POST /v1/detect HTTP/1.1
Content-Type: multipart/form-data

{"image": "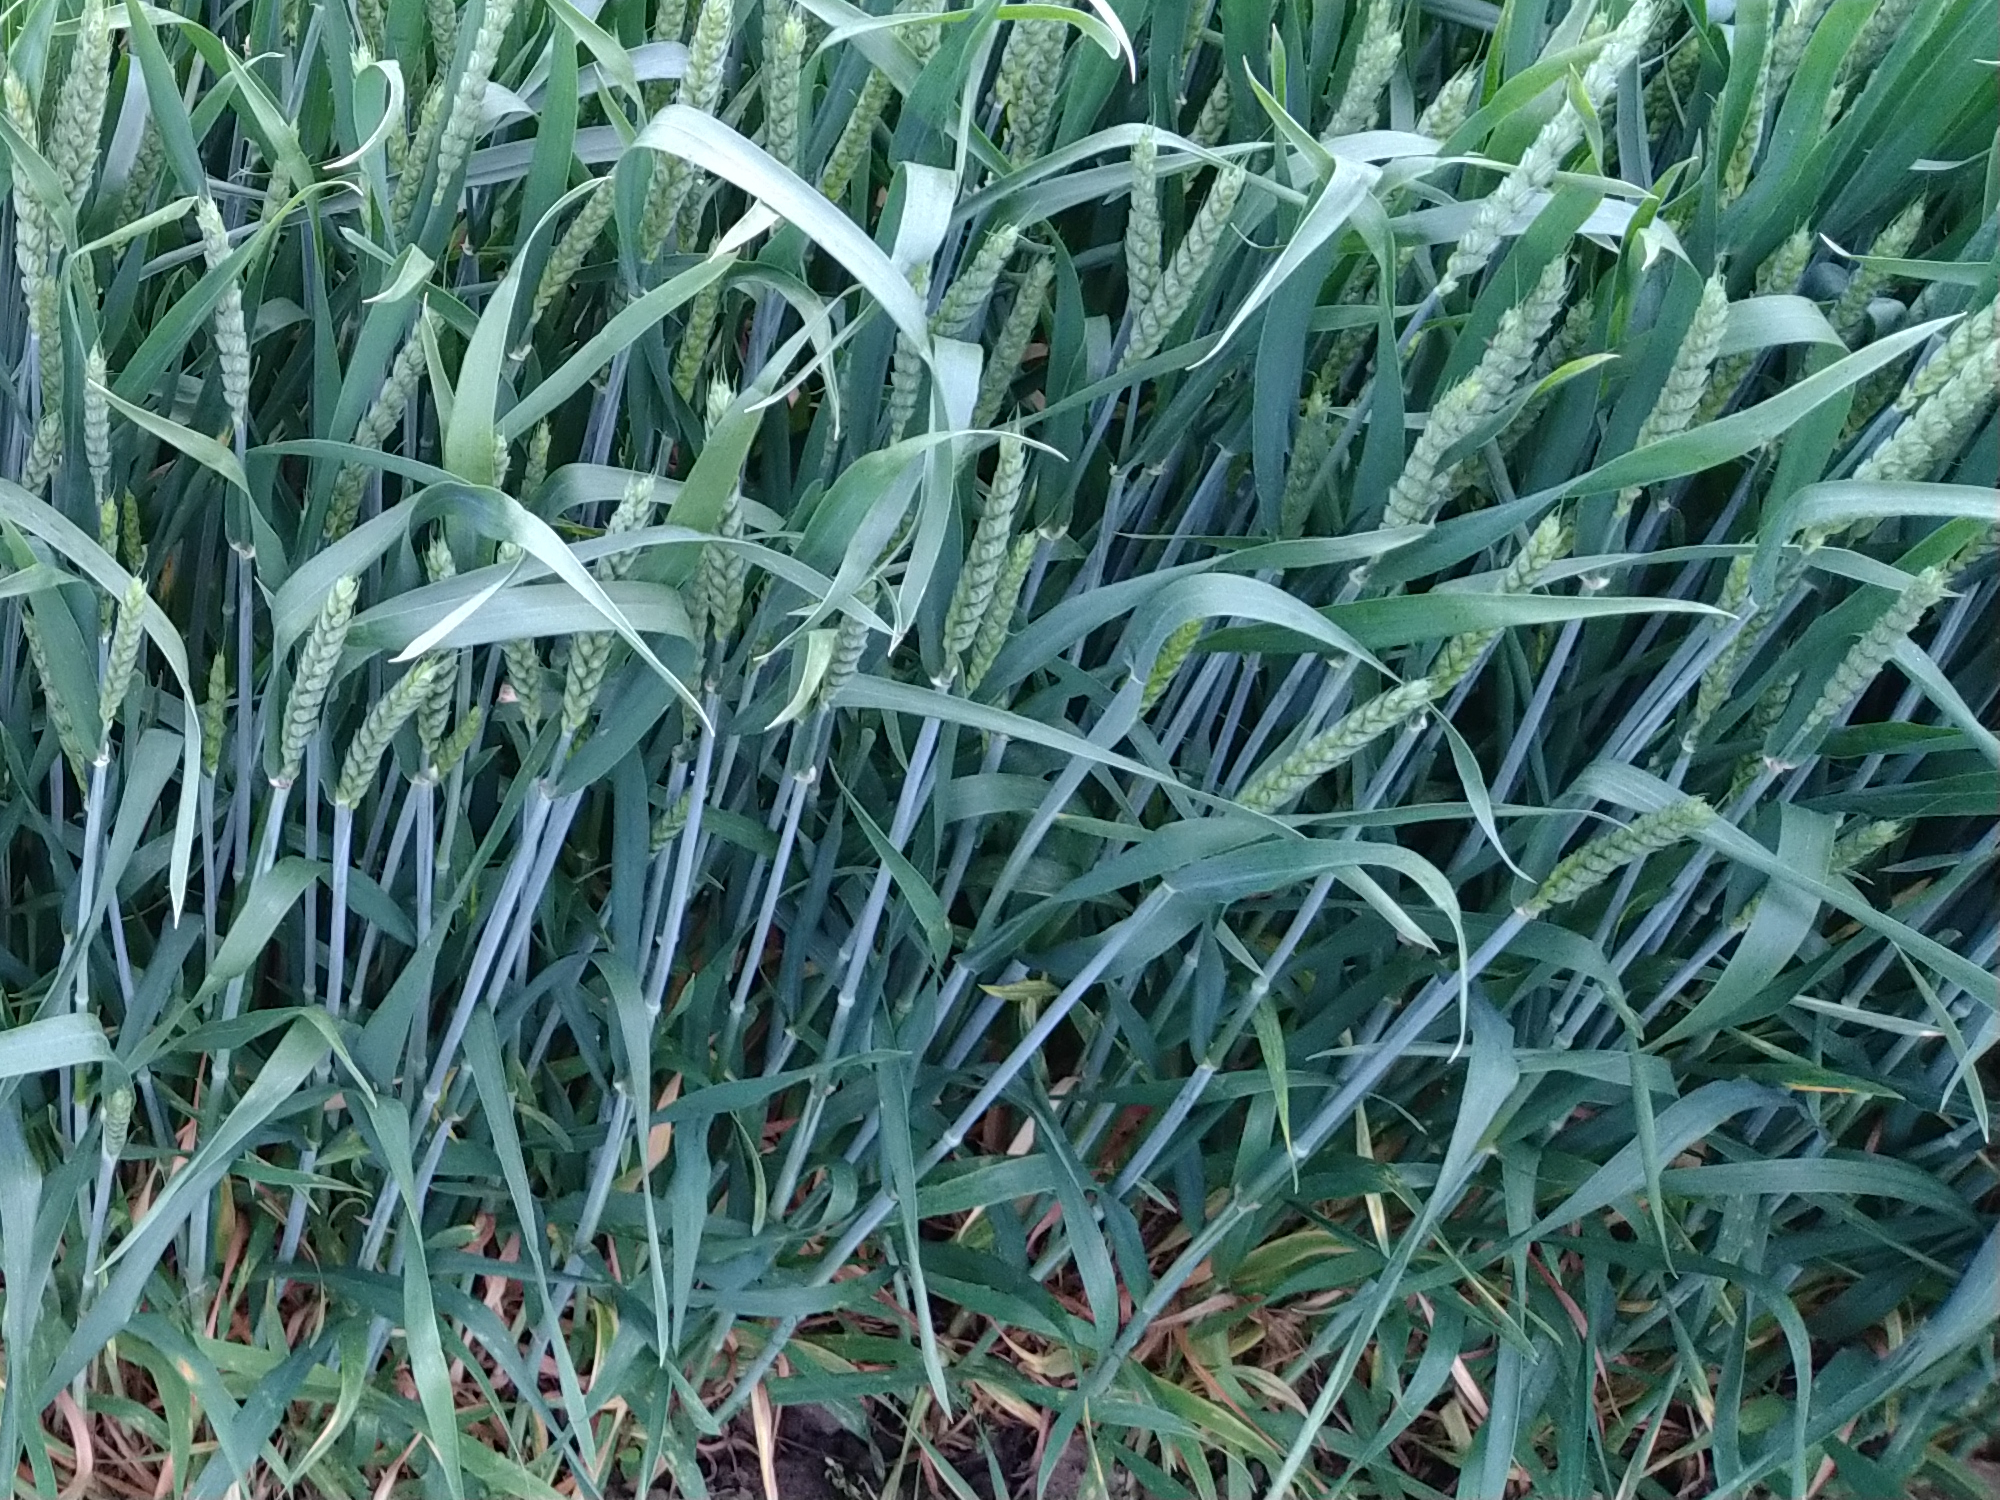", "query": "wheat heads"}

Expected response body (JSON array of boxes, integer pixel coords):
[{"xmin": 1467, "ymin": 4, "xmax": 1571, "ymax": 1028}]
[
  {"xmin": 1448, "ymin": 36, "xmax": 1620, "ymax": 275},
  {"xmin": 1766, "ymin": 231, "xmax": 1814, "ymax": 295},
  {"xmin": 1616, "ymin": 420, "xmax": 1646, "ymax": 512},
  {"xmin": 646, "ymin": 0, "xmax": 736, "ymax": 253},
  {"xmin": 202, "ymin": 653, "xmax": 226, "ymax": 771},
  {"xmin": 427, "ymin": 0, "xmax": 457, "ymax": 70},
  {"xmin": 907, "ymin": 0, "xmax": 964, "ymax": 60},
  {"xmin": 1707, "ymin": 90, "xmax": 1726, "ymax": 160},
  {"xmin": 261, "ymin": 158, "xmax": 290, "ymax": 236},
  {"xmin": 1823, "ymin": 352, "xmax": 2000, "ymax": 535},
  {"xmin": 1767, "ymin": 0, "xmax": 1821, "ymax": 100},
  {"xmin": 1184, "ymin": 71, "xmax": 1232, "ymax": 182},
  {"xmin": 1011, "ymin": 21, "xmax": 1067, "ymax": 168},
  {"xmin": 279, "ymin": 578, "xmax": 361, "ymax": 779},
  {"xmin": 113, "ymin": 116, "xmax": 166, "ymax": 256},
  {"xmin": 995, "ymin": 0, "xmax": 1127, "ymax": 103},
  {"xmin": 107, "ymin": 1089, "xmax": 132, "ymax": 1153},
  {"xmin": 102, "ymin": 578, "xmax": 148, "ymax": 716},
  {"xmin": 706, "ymin": 381, "xmax": 733, "ymax": 439},
  {"xmin": 432, "ymin": 0, "xmax": 532, "ymax": 201},
  {"xmin": 389, "ymin": 91, "xmax": 444, "ymax": 237},
  {"xmin": 683, "ymin": 559, "xmax": 710, "ymax": 734},
  {"xmin": 981, "ymin": 977, "xmax": 1058, "ymax": 998},
  {"xmin": 388, "ymin": 109, "xmax": 409, "ymax": 171},
  {"xmin": 569, "ymin": 716, "xmax": 595, "ymax": 761},
  {"xmin": 820, "ymin": 67, "xmax": 893, "ymax": 200},
  {"xmin": 707, "ymin": 482, "xmax": 745, "ymax": 635},
  {"xmin": 1491, "ymin": 304, "xmax": 1596, "ymax": 448},
  {"xmin": 263, "ymin": 128, "xmax": 296, "ymax": 223},
  {"xmin": 1139, "ymin": 618, "xmax": 1206, "ymax": 715},
  {"xmin": 1941, "ymin": 484, "xmax": 2000, "ymax": 574},
  {"xmin": 609, "ymin": 249, "xmax": 637, "ymax": 319},
  {"xmin": 1384, "ymin": 258, "xmax": 1572, "ymax": 529},
  {"xmin": 1622, "ymin": 282, "xmax": 1731, "ymax": 498},
  {"xmin": 971, "ymin": 262, "xmax": 1054, "ymax": 426},
  {"xmin": 752, "ymin": 567, "xmax": 772, "ymax": 658},
  {"xmin": 1644, "ymin": 37, "xmax": 1701, "ymax": 134},
  {"xmin": 648, "ymin": 0, "xmax": 694, "ymax": 108},
  {"xmin": 1730, "ymin": 752, "xmax": 1765, "ymax": 801},
  {"xmin": 1796, "ymin": 0, "xmax": 1854, "ymax": 25},
  {"xmin": 1694, "ymin": 350, "xmax": 1762, "ymax": 427},
  {"xmin": 51, "ymin": 0, "xmax": 114, "ymax": 204},
  {"xmin": 870, "ymin": 503, "xmax": 919, "ymax": 568},
  {"xmin": 522, "ymin": 422, "xmax": 552, "ymax": 504},
  {"xmin": 1795, "ymin": 572, "xmax": 1949, "ymax": 741},
  {"xmin": 687, "ymin": 0, "xmax": 710, "ymax": 35},
  {"xmin": 39, "ymin": 278, "xmax": 64, "ymax": 417},
  {"xmin": 1845, "ymin": 476, "xmax": 1936, "ymax": 538},
  {"xmin": 649, "ymin": 791, "xmax": 694, "ymax": 853},
  {"xmin": 1895, "ymin": 293, "xmax": 2000, "ymax": 398},
  {"xmin": 5, "ymin": 77, "xmax": 48, "ymax": 297},
  {"xmin": 560, "ymin": 484, "xmax": 657, "ymax": 725},
  {"xmin": 968, "ymin": 531, "xmax": 1038, "ymax": 689},
  {"xmin": 1427, "ymin": 522, "xmax": 1566, "ymax": 693},
  {"xmin": 1238, "ymin": 682, "xmax": 1430, "ymax": 812},
  {"xmin": 1728, "ymin": 673, "xmax": 1799, "ymax": 746},
  {"xmin": 491, "ymin": 434, "xmax": 510, "ymax": 490},
  {"xmin": 505, "ymin": 638, "xmax": 542, "ymax": 725},
  {"xmin": 337, "ymin": 661, "xmax": 438, "ymax": 799},
  {"xmin": 422, "ymin": 545, "xmax": 458, "ymax": 744},
  {"xmin": 1389, "ymin": 76, "xmax": 1475, "ymax": 205},
  {"xmin": 1314, "ymin": 251, "xmax": 1424, "ymax": 393},
  {"xmin": 324, "ymin": 478, "xmax": 383, "ymax": 542},
  {"xmin": 75, "ymin": 250, "xmax": 97, "ymax": 314},
  {"xmin": 352, "ymin": 0, "xmax": 385, "ymax": 55},
  {"xmin": 1341, "ymin": 0, "xmax": 1393, "ymax": 112},
  {"xmin": 98, "ymin": 500, "xmax": 117, "ymax": 624},
  {"xmin": 762, "ymin": 0, "xmax": 772, "ymax": 122},
  {"xmin": 122, "ymin": 490, "xmax": 144, "ymax": 570},
  {"xmin": 1765, "ymin": 0, "xmax": 1781, "ymax": 38},
  {"xmin": 1696, "ymin": 555, "xmax": 1808, "ymax": 709},
  {"xmin": 86, "ymin": 349, "xmax": 111, "ymax": 493},
  {"xmin": 434, "ymin": 707, "xmax": 485, "ymax": 775},
  {"xmin": 1801, "ymin": 205, "xmax": 1924, "ymax": 377},
  {"xmin": 1127, "ymin": 132, "xmax": 1162, "ymax": 309},
  {"xmin": 1534, "ymin": 800, "xmax": 1715, "ymax": 906},
  {"xmin": 1324, "ymin": 37, "xmax": 1403, "ymax": 140},
  {"xmin": 1281, "ymin": 397, "xmax": 1328, "ymax": 534},
  {"xmin": 1830, "ymin": 0, "xmax": 1963, "ymax": 96},
  {"xmin": 1118, "ymin": 173, "xmax": 1248, "ymax": 370},
  {"xmin": 21, "ymin": 613, "xmax": 89, "ymax": 789},
  {"xmin": 1022, "ymin": 994, "xmax": 1039, "ymax": 1037},
  {"xmin": 672, "ymin": 279, "xmax": 722, "ymax": 399},
  {"xmin": 1733, "ymin": 820, "xmax": 1906, "ymax": 928},
  {"xmin": 888, "ymin": 265, "xmax": 930, "ymax": 444},
  {"xmin": 821, "ymin": 580, "xmax": 879, "ymax": 701},
  {"xmin": 536, "ymin": 170, "xmax": 618, "ymax": 307},
  {"xmin": 22, "ymin": 414, "xmax": 62, "ymax": 496},
  {"xmin": 942, "ymin": 436, "xmax": 1027, "ymax": 650},
  {"xmin": 769, "ymin": 19, "xmax": 805, "ymax": 171},
  {"xmin": 197, "ymin": 202, "xmax": 252, "ymax": 398},
  {"xmin": 322, "ymin": 320, "xmax": 433, "ymax": 538},
  {"xmin": 18, "ymin": 249, "xmax": 53, "ymax": 322},
  {"xmin": 514, "ymin": 1060, "xmax": 535, "ymax": 1125},
  {"xmin": 1766, "ymin": 0, "xmax": 1853, "ymax": 104},
  {"xmin": 1723, "ymin": 39, "xmax": 1774, "ymax": 197},
  {"xmin": 930, "ymin": 228, "xmax": 1019, "ymax": 334}
]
